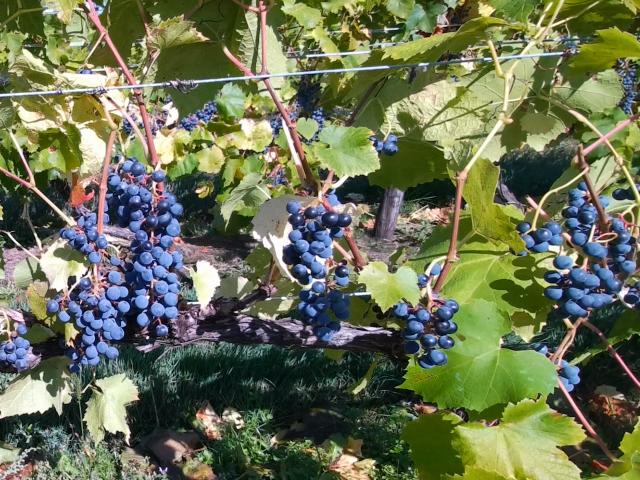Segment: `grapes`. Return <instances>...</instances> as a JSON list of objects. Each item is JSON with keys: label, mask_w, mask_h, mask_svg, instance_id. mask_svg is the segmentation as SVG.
<instances>
[{"label": "grapes", "mask_w": 640, "mask_h": 480, "mask_svg": "<svg viewBox=\"0 0 640 480\" xmlns=\"http://www.w3.org/2000/svg\"><path fill=\"white\" fill-rule=\"evenodd\" d=\"M108 184L115 187V190L106 193L104 212H109V204H111L118 218V224L136 233V239L131 243V250L137 255L132 258L133 263L124 264V270L127 272L125 279L133 284V292L136 295L130 300V304L133 308L142 311L136 316V324L147 327L155 317L164 315L168 319L177 317L179 312L176 306L179 302L177 293L181 283L178 281L179 276L176 272H168L165 268L172 266L174 269H182L184 267L181 251L169 253L166 251L173 247V237H178L182 231V226L175 217L183 213V205L178 203L174 193L164 192L163 199L157 204L160 213L151 214L149 204L153 194L147 187L128 185L121 181L118 173H111L108 176ZM143 218L150 228H155L158 224L167 226L166 231L163 229L154 231L155 240L158 242L156 245L148 240L147 232L142 229L140 221ZM154 278L162 279L154 284V291L164 296L158 297L151 305L146 296L150 288L149 284ZM78 287L81 290L78 297L75 292H72L66 305L68 311L76 317V326L85 329L81 340L88 346L84 349L79 362L83 366H97L101 363L99 354H104L110 360H116L119 357V349L116 346H109L106 342L95 341V333L103 329L102 336L112 341H120L125 337L127 319L120 314L130 311V304L124 300L131 296V288L109 286L99 298L92 297L90 292H84L92 288L89 278L81 279ZM78 298L91 307L98 306V310L102 313L101 319L96 318L92 310L83 313L81 305L77 302Z\"/></svg>", "instance_id": "1"}, {"label": "grapes", "mask_w": 640, "mask_h": 480, "mask_svg": "<svg viewBox=\"0 0 640 480\" xmlns=\"http://www.w3.org/2000/svg\"><path fill=\"white\" fill-rule=\"evenodd\" d=\"M301 210L299 200H289L286 203V212L291 214L288 223L293 226L288 233V240L294 244L283 246L280 254L284 265H294L292 275L301 285L309 286L313 279L316 280L312 289L300 291L299 299L302 302L297 305V311L308 317L309 325H316L313 333L321 342H329L340 329V324L330 321L331 315L325 311L331 309L336 317L347 319L350 315V300L342 298L339 290H333L328 297L316 299L315 293L326 290V285L319 281L324 280L327 275V269L317 262V257H332L333 249L330 246L335 239L344 236V230L340 227H349L352 217L348 213L339 215L328 212V207L322 203H318L316 207H307L304 215Z\"/></svg>", "instance_id": "2"}, {"label": "grapes", "mask_w": 640, "mask_h": 480, "mask_svg": "<svg viewBox=\"0 0 640 480\" xmlns=\"http://www.w3.org/2000/svg\"><path fill=\"white\" fill-rule=\"evenodd\" d=\"M611 229L616 233L617 245L613 248L615 262H610L608 267H601L598 263L591 266V273L584 269H571L568 276L576 283L575 287L568 289L570 299L564 305V311L575 317H586L588 309H601L613 301V295L621 291L622 280L613 276L621 271L633 273L636 270V262L626 259L627 254L633 251L631 243L634 236L625 230V223L621 219H615L607 215Z\"/></svg>", "instance_id": "3"}, {"label": "grapes", "mask_w": 640, "mask_h": 480, "mask_svg": "<svg viewBox=\"0 0 640 480\" xmlns=\"http://www.w3.org/2000/svg\"><path fill=\"white\" fill-rule=\"evenodd\" d=\"M459 311V305L454 299L446 298L443 306L437 311L439 317L434 329L441 336L439 339L434 335H422L420 344L415 340L425 330V324L431 320L427 309H419L414 314H409V307L404 302H397L394 307V314L397 317L406 316L407 327L402 337L408 339L404 342L403 349L409 355H417L421 351V346L425 348L427 355L418 358L419 365L424 370H432L435 367H443L448 362V356L441 351H435L440 345L443 350H450L455 346L454 338L458 332V325L452 321L454 315Z\"/></svg>", "instance_id": "4"}, {"label": "grapes", "mask_w": 640, "mask_h": 480, "mask_svg": "<svg viewBox=\"0 0 640 480\" xmlns=\"http://www.w3.org/2000/svg\"><path fill=\"white\" fill-rule=\"evenodd\" d=\"M588 189L585 181H579L577 188H572L569 197L572 200L570 207L562 211V215L568 218L565 226L570 230L571 243L576 247H582L584 254L591 258L605 259L609 255V249L599 242L586 243L595 219L599 217L596 205L593 202L586 203L583 192Z\"/></svg>", "instance_id": "5"}, {"label": "grapes", "mask_w": 640, "mask_h": 480, "mask_svg": "<svg viewBox=\"0 0 640 480\" xmlns=\"http://www.w3.org/2000/svg\"><path fill=\"white\" fill-rule=\"evenodd\" d=\"M96 224V213H89L86 218L81 216L78 220V225L85 229V234L78 233L74 228H62L59 232V237L62 240H70L69 246L79 250L83 255H88V261L93 264H98L102 261V254L93 251V246L87 241L95 242L98 249H103L104 251L109 249L107 237L104 234H99L95 228Z\"/></svg>", "instance_id": "6"}, {"label": "grapes", "mask_w": 640, "mask_h": 480, "mask_svg": "<svg viewBox=\"0 0 640 480\" xmlns=\"http://www.w3.org/2000/svg\"><path fill=\"white\" fill-rule=\"evenodd\" d=\"M563 226L559 223L548 222L531 235H524L522 240L526 247L533 252L546 254L549 247H560L564 243Z\"/></svg>", "instance_id": "7"}, {"label": "grapes", "mask_w": 640, "mask_h": 480, "mask_svg": "<svg viewBox=\"0 0 640 480\" xmlns=\"http://www.w3.org/2000/svg\"><path fill=\"white\" fill-rule=\"evenodd\" d=\"M28 332V326L26 324H19L16 327V333L18 334L12 343L3 341L0 348V360L8 361L10 364H15L19 370H23L28 365V358L26 351L30 347V341L24 336Z\"/></svg>", "instance_id": "8"}, {"label": "grapes", "mask_w": 640, "mask_h": 480, "mask_svg": "<svg viewBox=\"0 0 640 480\" xmlns=\"http://www.w3.org/2000/svg\"><path fill=\"white\" fill-rule=\"evenodd\" d=\"M561 375L559 380L565 387L566 391L571 392L575 390L576 385L582 383V377L580 375V368L578 366L571 367L570 363L566 359H561Z\"/></svg>", "instance_id": "9"}, {"label": "grapes", "mask_w": 640, "mask_h": 480, "mask_svg": "<svg viewBox=\"0 0 640 480\" xmlns=\"http://www.w3.org/2000/svg\"><path fill=\"white\" fill-rule=\"evenodd\" d=\"M369 141L375 144V150L377 152H383L387 157H394L398 154L399 148L397 147L398 137L394 134H390L383 142L377 139L375 136H371Z\"/></svg>", "instance_id": "10"}, {"label": "grapes", "mask_w": 640, "mask_h": 480, "mask_svg": "<svg viewBox=\"0 0 640 480\" xmlns=\"http://www.w3.org/2000/svg\"><path fill=\"white\" fill-rule=\"evenodd\" d=\"M122 169L125 173L131 177L137 178L139 181L145 179L147 168L136 157H129L122 165Z\"/></svg>", "instance_id": "11"}, {"label": "grapes", "mask_w": 640, "mask_h": 480, "mask_svg": "<svg viewBox=\"0 0 640 480\" xmlns=\"http://www.w3.org/2000/svg\"><path fill=\"white\" fill-rule=\"evenodd\" d=\"M63 299V296L61 294H57L54 297V301L50 300L49 302H47V308H48V312L50 314H57L58 313V320L61 323H69L71 321V315L64 310H60V305H59V301H61Z\"/></svg>", "instance_id": "12"}, {"label": "grapes", "mask_w": 640, "mask_h": 480, "mask_svg": "<svg viewBox=\"0 0 640 480\" xmlns=\"http://www.w3.org/2000/svg\"><path fill=\"white\" fill-rule=\"evenodd\" d=\"M333 280L339 286H345L350 282V269L346 266H339L334 269Z\"/></svg>", "instance_id": "13"}, {"label": "grapes", "mask_w": 640, "mask_h": 480, "mask_svg": "<svg viewBox=\"0 0 640 480\" xmlns=\"http://www.w3.org/2000/svg\"><path fill=\"white\" fill-rule=\"evenodd\" d=\"M627 199H629L630 201H633L635 199V195L630 188H627L626 190L618 189L613 192V200L615 202H622L626 201Z\"/></svg>", "instance_id": "14"}, {"label": "grapes", "mask_w": 640, "mask_h": 480, "mask_svg": "<svg viewBox=\"0 0 640 480\" xmlns=\"http://www.w3.org/2000/svg\"><path fill=\"white\" fill-rule=\"evenodd\" d=\"M640 283H637L635 287H632L625 295L624 300L630 304H636L640 297Z\"/></svg>", "instance_id": "15"}, {"label": "grapes", "mask_w": 640, "mask_h": 480, "mask_svg": "<svg viewBox=\"0 0 640 480\" xmlns=\"http://www.w3.org/2000/svg\"><path fill=\"white\" fill-rule=\"evenodd\" d=\"M155 331H156V334H157L158 336H165V335H167V334L169 333V330H168V328H167V325H164V324H162V325H161V324H158V325L156 326V328H155Z\"/></svg>", "instance_id": "16"}, {"label": "grapes", "mask_w": 640, "mask_h": 480, "mask_svg": "<svg viewBox=\"0 0 640 480\" xmlns=\"http://www.w3.org/2000/svg\"><path fill=\"white\" fill-rule=\"evenodd\" d=\"M599 197H600V199H601V201H602V203H603L605 208H608L611 205V200H610V197L608 195L600 194Z\"/></svg>", "instance_id": "17"}]
</instances>
